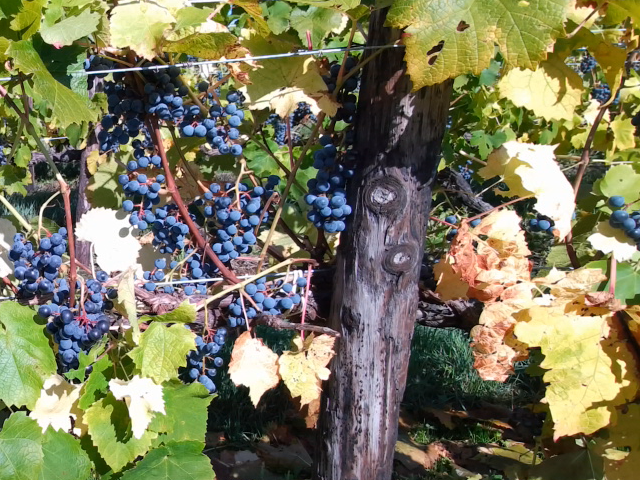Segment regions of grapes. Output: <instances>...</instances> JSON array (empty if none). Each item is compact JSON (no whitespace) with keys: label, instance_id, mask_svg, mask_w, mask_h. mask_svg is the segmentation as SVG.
<instances>
[{"label":"grapes","instance_id":"grapes-1","mask_svg":"<svg viewBox=\"0 0 640 480\" xmlns=\"http://www.w3.org/2000/svg\"><path fill=\"white\" fill-rule=\"evenodd\" d=\"M144 79L148 82L144 86V92L149 96V101L145 106L144 102L131 89L124 91V84L121 80L123 74L113 72V81L105 84L107 100L106 109L110 115H104L100 120L101 130L97 134L100 149L107 152L109 149L116 153L120 145H126L129 137L123 132L120 126H115L113 135H109L112 125H117L119 119L125 114V122L128 129L127 134L136 137L139 133L140 122L147 120V114L156 113L162 120L172 121L174 124L180 122L179 129L183 137H205L212 139L213 146H219L222 155L241 156L243 147L240 144L225 143L228 136L231 140L240 138V130L237 129L240 122L245 118V112L237 108L234 104L221 107L216 101L212 102L209 109L212 118H200L199 126L194 127L192 116L201 112L199 105H184V99L188 95V89L181 86L178 79L180 70L177 66H168L165 70L142 71Z\"/></svg>","mask_w":640,"mask_h":480},{"label":"grapes","instance_id":"grapes-2","mask_svg":"<svg viewBox=\"0 0 640 480\" xmlns=\"http://www.w3.org/2000/svg\"><path fill=\"white\" fill-rule=\"evenodd\" d=\"M108 278V272L97 270L96 279L85 280V286L91 294L84 302L85 317L89 319L86 325L80 326V322L74 320L69 303L60 306L65 298L70 297V283L65 279L56 280L58 291L51 298L52 303L38 306V314L41 317H54L50 323L46 324V329L50 334L55 335V341L60 345L63 373H68L72 368L77 369L79 352L88 355L96 341L110 331V320L102 310H112L114 302L112 300L103 302V294L109 299H115L118 293L115 288L102 286Z\"/></svg>","mask_w":640,"mask_h":480},{"label":"grapes","instance_id":"grapes-3","mask_svg":"<svg viewBox=\"0 0 640 480\" xmlns=\"http://www.w3.org/2000/svg\"><path fill=\"white\" fill-rule=\"evenodd\" d=\"M281 183V178L277 175L270 174L268 183L265 187L257 186L250 193L251 199L246 194L239 197V205L246 213L248 218H242V213L230 208L233 199L230 196L216 197L221 191L218 183L210 185V191L204 193V199H197V206H205L203 216L212 218L216 211L217 222L222 226L216 232V237L220 242H213L211 247L216 254L224 261L229 262L231 259H237L241 254H247L256 242L254 226L260 223V216L263 212L261 195L265 194L266 198L274 193L276 185ZM239 221L241 227H246L241 237H236L237 233L235 223Z\"/></svg>","mask_w":640,"mask_h":480},{"label":"grapes","instance_id":"grapes-4","mask_svg":"<svg viewBox=\"0 0 640 480\" xmlns=\"http://www.w3.org/2000/svg\"><path fill=\"white\" fill-rule=\"evenodd\" d=\"M320 145L322 149L314 153L313 162V168L319 171L316 179L308 181L309 193L304 196L306 204L313 205V210L307 213L306 219L314 221L315 227L323 228L324 232H344L348 230L346 216L352 214L353 206L347 203L343 178H352L354 170L335 164L337 150L331 144L329 135L320 138ZM324 192L331 193L334 197L330 201L328 197H318Z\"/></svg>","mask_w":640,"mask_h":480},{"label":"grapes","instance_id":"grapes-5","mask_svg":"<svg viewBox=\"0 0 640 480\" xmlns=\"http://www.w3.org/2000/svg\"><path fill=\"white\" fill-rule=\"evenodd\" d=\"M147 182L146 175H137L136 181H131V177L126 174H120L117 177V183L122 185L123 191L138 192L139 195H145L144 211L140 216L138 210H133L134 203L131 200H124L122 207L125 212H131L128 223L131 226H138L140 231H144L148 228V223H153V236L155 239L152 241L154 246H158L160 243H164L166 246H161L159 252L161 254L173 253L175 249H184L187 257L189 253L194 251L192 245H186L183 241L184 237L189 234V229L185 223H180L173 215H169V211L178 209L172 204L167 203L163 207H156L152 210L153 205L160 203V197L158 192L161 190V184L164 183L162 175L156 176V182L151 185L142 184Z\"/></svg>","mask_w":640,"mask_h":480},{"label":"grapes","instance_id":"grapes-6","mask_svg":"<svg viewBox=\"0 0 640 480\" xmlns=\"http://www.w3.org/2000/svg\"><path fill=\"white\" fill-rule=\"evenodd\" d=\"M67 228L61 227L51 237L39 240L41 255H35L31 240L24 241L23 233L13 234V245L8 252V259L14 262V277L20 282L19 287L26 298L38 292L50 294L55 289L52 282L59 276L58 269L62 264L61 256L66 252Z\"/></svg>","mask_w":640,"mask_h":480},{"label":"grapes","instance_id":"grapes-7","mask_svg":"<svg viewBox=\"0 0 640 480\" xmlns=\"http://www.w3.org/2000/svg\"><path fill=\"white\" fill-rule=\"evenodd\" d=\"M228 336L229 333L227 327H217L215 334L213 335V342L205 343L204 338L201 335H198L195 338L197 350L189 351L188 359L190 360V364L196 367L189 370V376L192 379H199L203 386L209 391L216 390V384L209 376H216L217 369L215 367H210L208 369V375L200 374V371L203 369L202 358L207 357L208 355H218L221 352V348L225 347L226 342L228 341Z\"/></svg>","mask_w":640,"mask_h":480},{"label":"grapes","instance_id":"grapes-8","mask_svg":"<svg viewBox=\"0 0 640 480\" xmlns=\"http://www.w3.org/2000/svg\"><path fill=\"white\" fill-rule=\"evenodd\" d=\"M268 275L261 276L256 279L254 283H248L245 285V291L253 299L258 308L262 310L265 315H282L287 309H290L293 304L301 303V294H290V297H267L262 291L267 290L265 285Z\"/></svg>","mask_w":640,"mask_h":480},{"label":"grapes","instance_id":"grapes-9","mask_svg":"<svg viewBox=\"0 0 640 480\" xmlns=\"http://www.w3.org/2000/svg\"><path fill=\"white\" fill-rule=\"evenodd\" d=\"M143 134L146 136V140L141 142L139 139H135L132 142L133 148L136 149L134 151V157L138 159V161L130 160L128 162V164L126 165V168L129 171H135L136 169H145L150 163L153 164L154 167L157 169L161 168L160 158L158 154H154L151 157L150 156L145 157V151L142 148H140V147H144L146 148L147 151L155 150L151 133L148 132L147 129H144Z\"/></svg>","mask_w":640,"mask_h":480},{"label":"grapes","instance_id":"grapes-10","mask_svg":"<svg viewBox=\"0 0 640 480\" xmlns=\"http://www.w3.org/2000/svg\"><path fill=\"white\" fill-rule=\"evenodd\" d=\"M610 225L613 229L625 230V234L629 238H633L640 251V212L633 211L629 214L627 211L614 210L610 217Z\"/></svg>","mask_w":640,"mask_h":480},{"label":"grapes","instance_id":"grapes-11","mask_svg":"<svg viewBox=\"0 0 640 480\" xmlns=\"http://www.w3.org/2000/svg\"><path fill=\"white\" fill-rule=\"evenodd\" d=\"M187 264L189 265V272L191 273L192 278L194 277H206L211 278L214 276V273H219L220 270L216 268L213 264L205 263L202 265V258L200 253H194L187 260Z\"/></svg>","mask_w":640,"mask_h":480},{"label":"grapes","instance_id":"grapes-12","mask_svg":"<svg viewBox=\"0 0 640 480\" xmlns=\"http://www.w3.org/2000/svg\"><path fill=\"white\" fill-rule=\"evenodd\" d=\"M356 103H357V97L354 94L348 95L344 102L343 110L338 109L336 112V116H332L331 120L332 121L342 120L347 124H352L356 120V114H355V112L357 111V107L355 105Z\"/></svg>","mask_w":640,"mask_h":480},{"label":"grapes","instance_id":"grapes-13","mask_svg":"<svg viewBox=\"0 0 640 480\" xmlns=\"http://www.w3.org/2000/svg\"><path fill=\"white\" fill-rule=\"evenodd\" d=\"M227 310L233 315L227 319V326L230 329H238L240 326L246 325V319L244 318V310L240 298L236 299V303L228 304Z\"/></svg>","mask_w":640,"mask_h":480},{"label":"grapes","instance_id":"grapes-14","mask_svg":"<svg viewBox=\"0 0 640 480\" xmlns=\"http://www.w3.org/2000/svg\"><path fill=\"white\" fill-rule=\"evenodd\" d=\"M117 68V63L112 62L109 58H101L95 54H92L89 59L84 60V69L88 71H105Z\"/></svg>","mask_w":640,"mask_h":480},{"label":"grapes","instance_id":"grapes-15","mask_svg":"<svg viewBox=\"0 0 640 480\" xmlns=\"http://www.w3.org/2000/svg\"><path fill=\"white\" fill-rule=\"evenodd\" d=\"M154 267L158 269V271H155L153 274L150 270L143 271V278L145 281L165 279L166 273L162 270L166 269L167 262L163 258H157L154 260Z\"/></svg>","mask_w":640,"mask_h":480},{"label":"grapes","instance_id":"grapes-16","mask_svg":"<svg viewBox=\"0 0 640 480\" xmlns=\"http://www.w3.org/2000/svg\"><path fill=\"white\" fill-rule=\"evenodd\" d=\"M329 69H330V79L326 75H323L322 79L325 82L326 87L328 88V92L332 93L334 91V88L336 87L337 76L341 70V64L337 63L336 61H333L330 64Z\"/></svg>","mask_w":640,"mask_h":480},{"label":"grapes","instance_id":"grapes-17","mask_svg":"<svg viewBox=\"0 0 640 480\" xmlns=\"http://www.w3.org/2000/svg\"><path fill=\"white\" fill-rule=\"evenodd\" d=\"M212 285H214V283L197 282L193 284H182V287L184 288V292L187 294H192L193 292L200 290L199 294L206 295L207 288Z\"/></svg>","mask_w":640,"mask_h":480}]
</instances>
